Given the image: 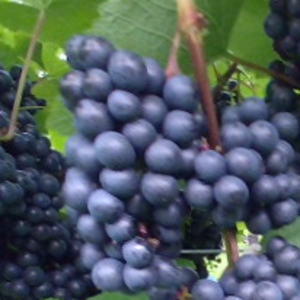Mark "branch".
<instances>
[{
	"mask_svg": "<svg viewBox=\"0 0 300 300\" xmlns=\"http://www.w3.org/2000/svg\"><path fill=\"white\" fill-rule=\"evenodd\" d=\"M177 20L183 24L189 49L195 60L199 88L202 92L209 127L211 148L218 154L223 152V141L220 132V122L216 116L213 97L209 87L206 70L204 67V55L200 46L207 35L208 19L202 13H197L192 0H177Z\"/></svg>",
	"mask_w": 300,
	"mask_h": 300,
	"instance_id": "30e6481e",
	"label": "branch"
}]
</instances>
